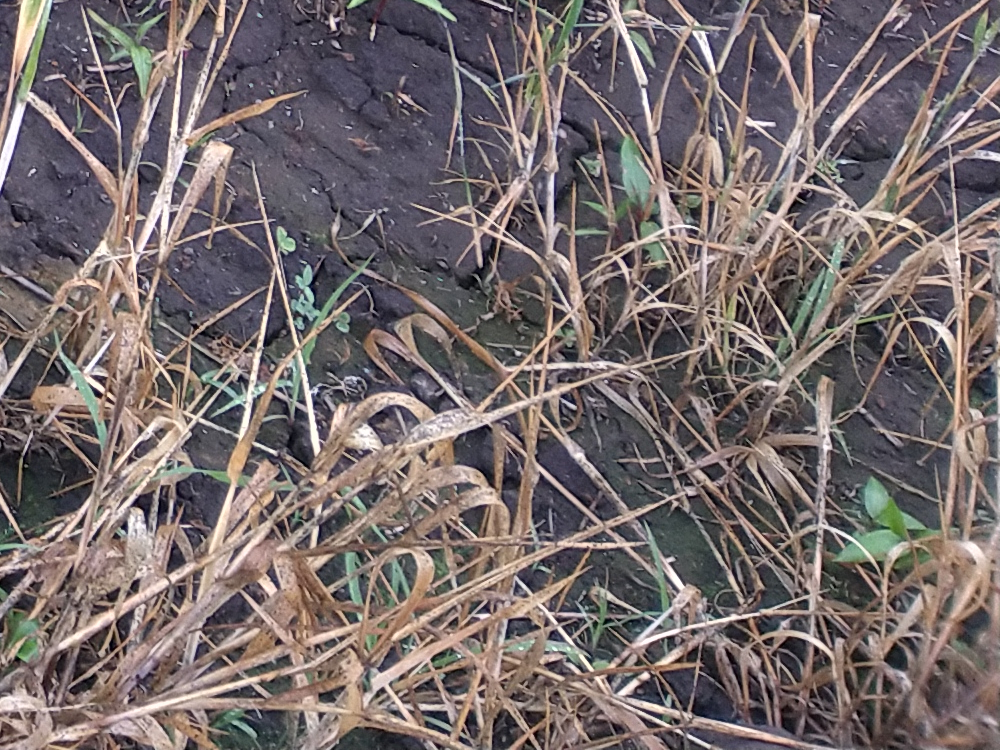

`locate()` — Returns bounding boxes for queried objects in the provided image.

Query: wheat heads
[373,410,481,476]
[116,318,143,394]
[313,405,351,479]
